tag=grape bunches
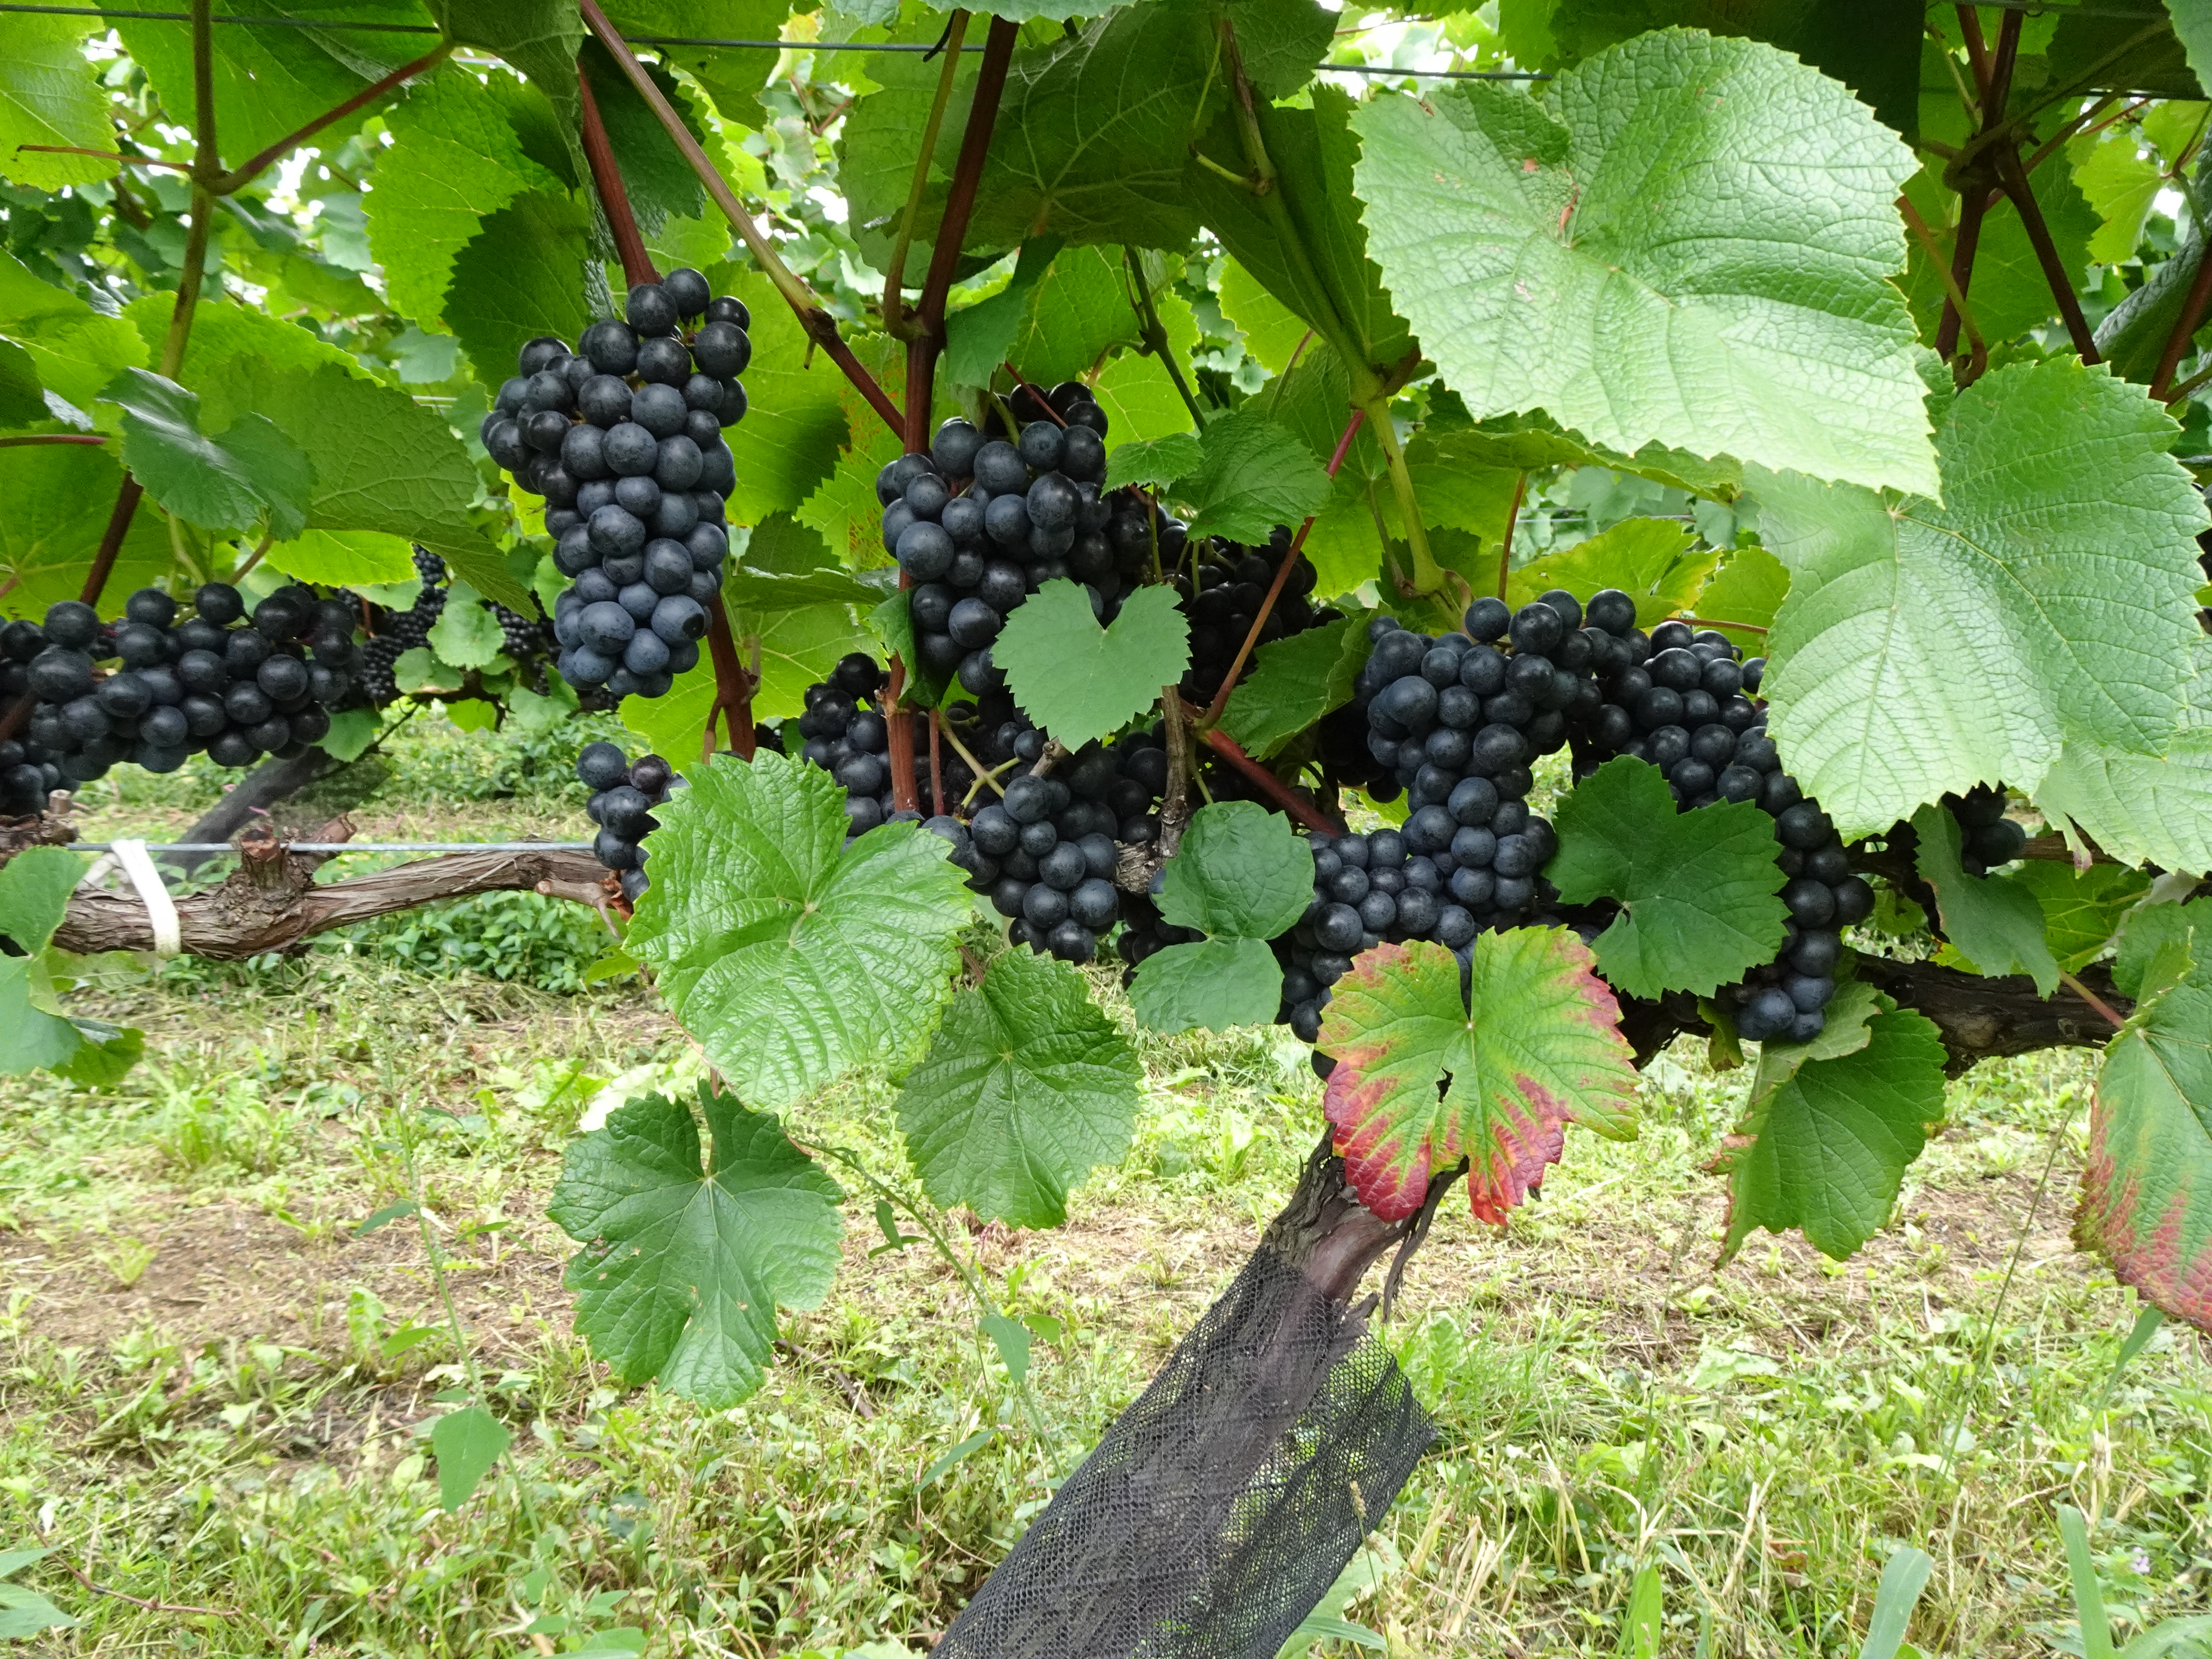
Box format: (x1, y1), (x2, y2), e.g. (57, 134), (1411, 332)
(1361, 587), (1636, 920)
(1158, 524), (1318, 707)
(1273, 829), (1483, 1082)
(0, 583), (358, 817)
(798, 652), (979, 836)
(1705, 708), (1876, 1045)
(576, 742), (691, 904)
(1884, 781), (2027, 943)
(1108, 720), (1276, 989)
(480, 268), (750, 697)
(876, 379), (1167, 723)
(1571, 620), (1766, 812)
(920, 722), (1120, 967)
